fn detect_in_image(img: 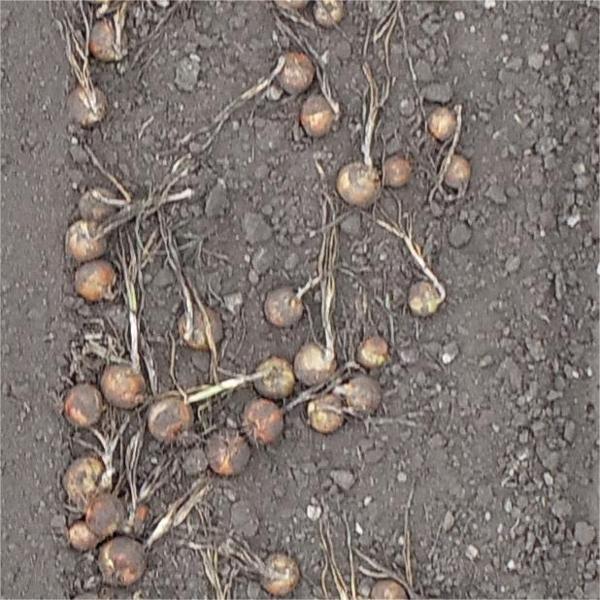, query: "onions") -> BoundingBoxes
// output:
[98,537,148,586]
[61,383,104,427]
[67,223,102,258]
[308,2,344,27]
[261,552,299,595]
[306,400,343,432]
[407,281,443,316]
[86,18,127,58]
[383,155,410,186]
[67,85,105,126]
[100,361,146,406]
[205,430,248,473]
[335,161,380,204]
[127,503,152,533]
[345,376,379,413]
[263,285,301,325]
[366,578,407,600]
[241,398,283,443]
[255,358,293,398]
[293,341,334,383]
[276,51,311,93]
[62,456,108,508]
[69,521,98,550]
[358,335,389,367]
[298,94,336,135]
[73,260,114,299]
[79,187,120,222]
[426,105,456,138]
[441,153,471,186]
[273,0,310,11]
[86,493,125,533]
[178,304,219,350]
[144,395,190,441]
